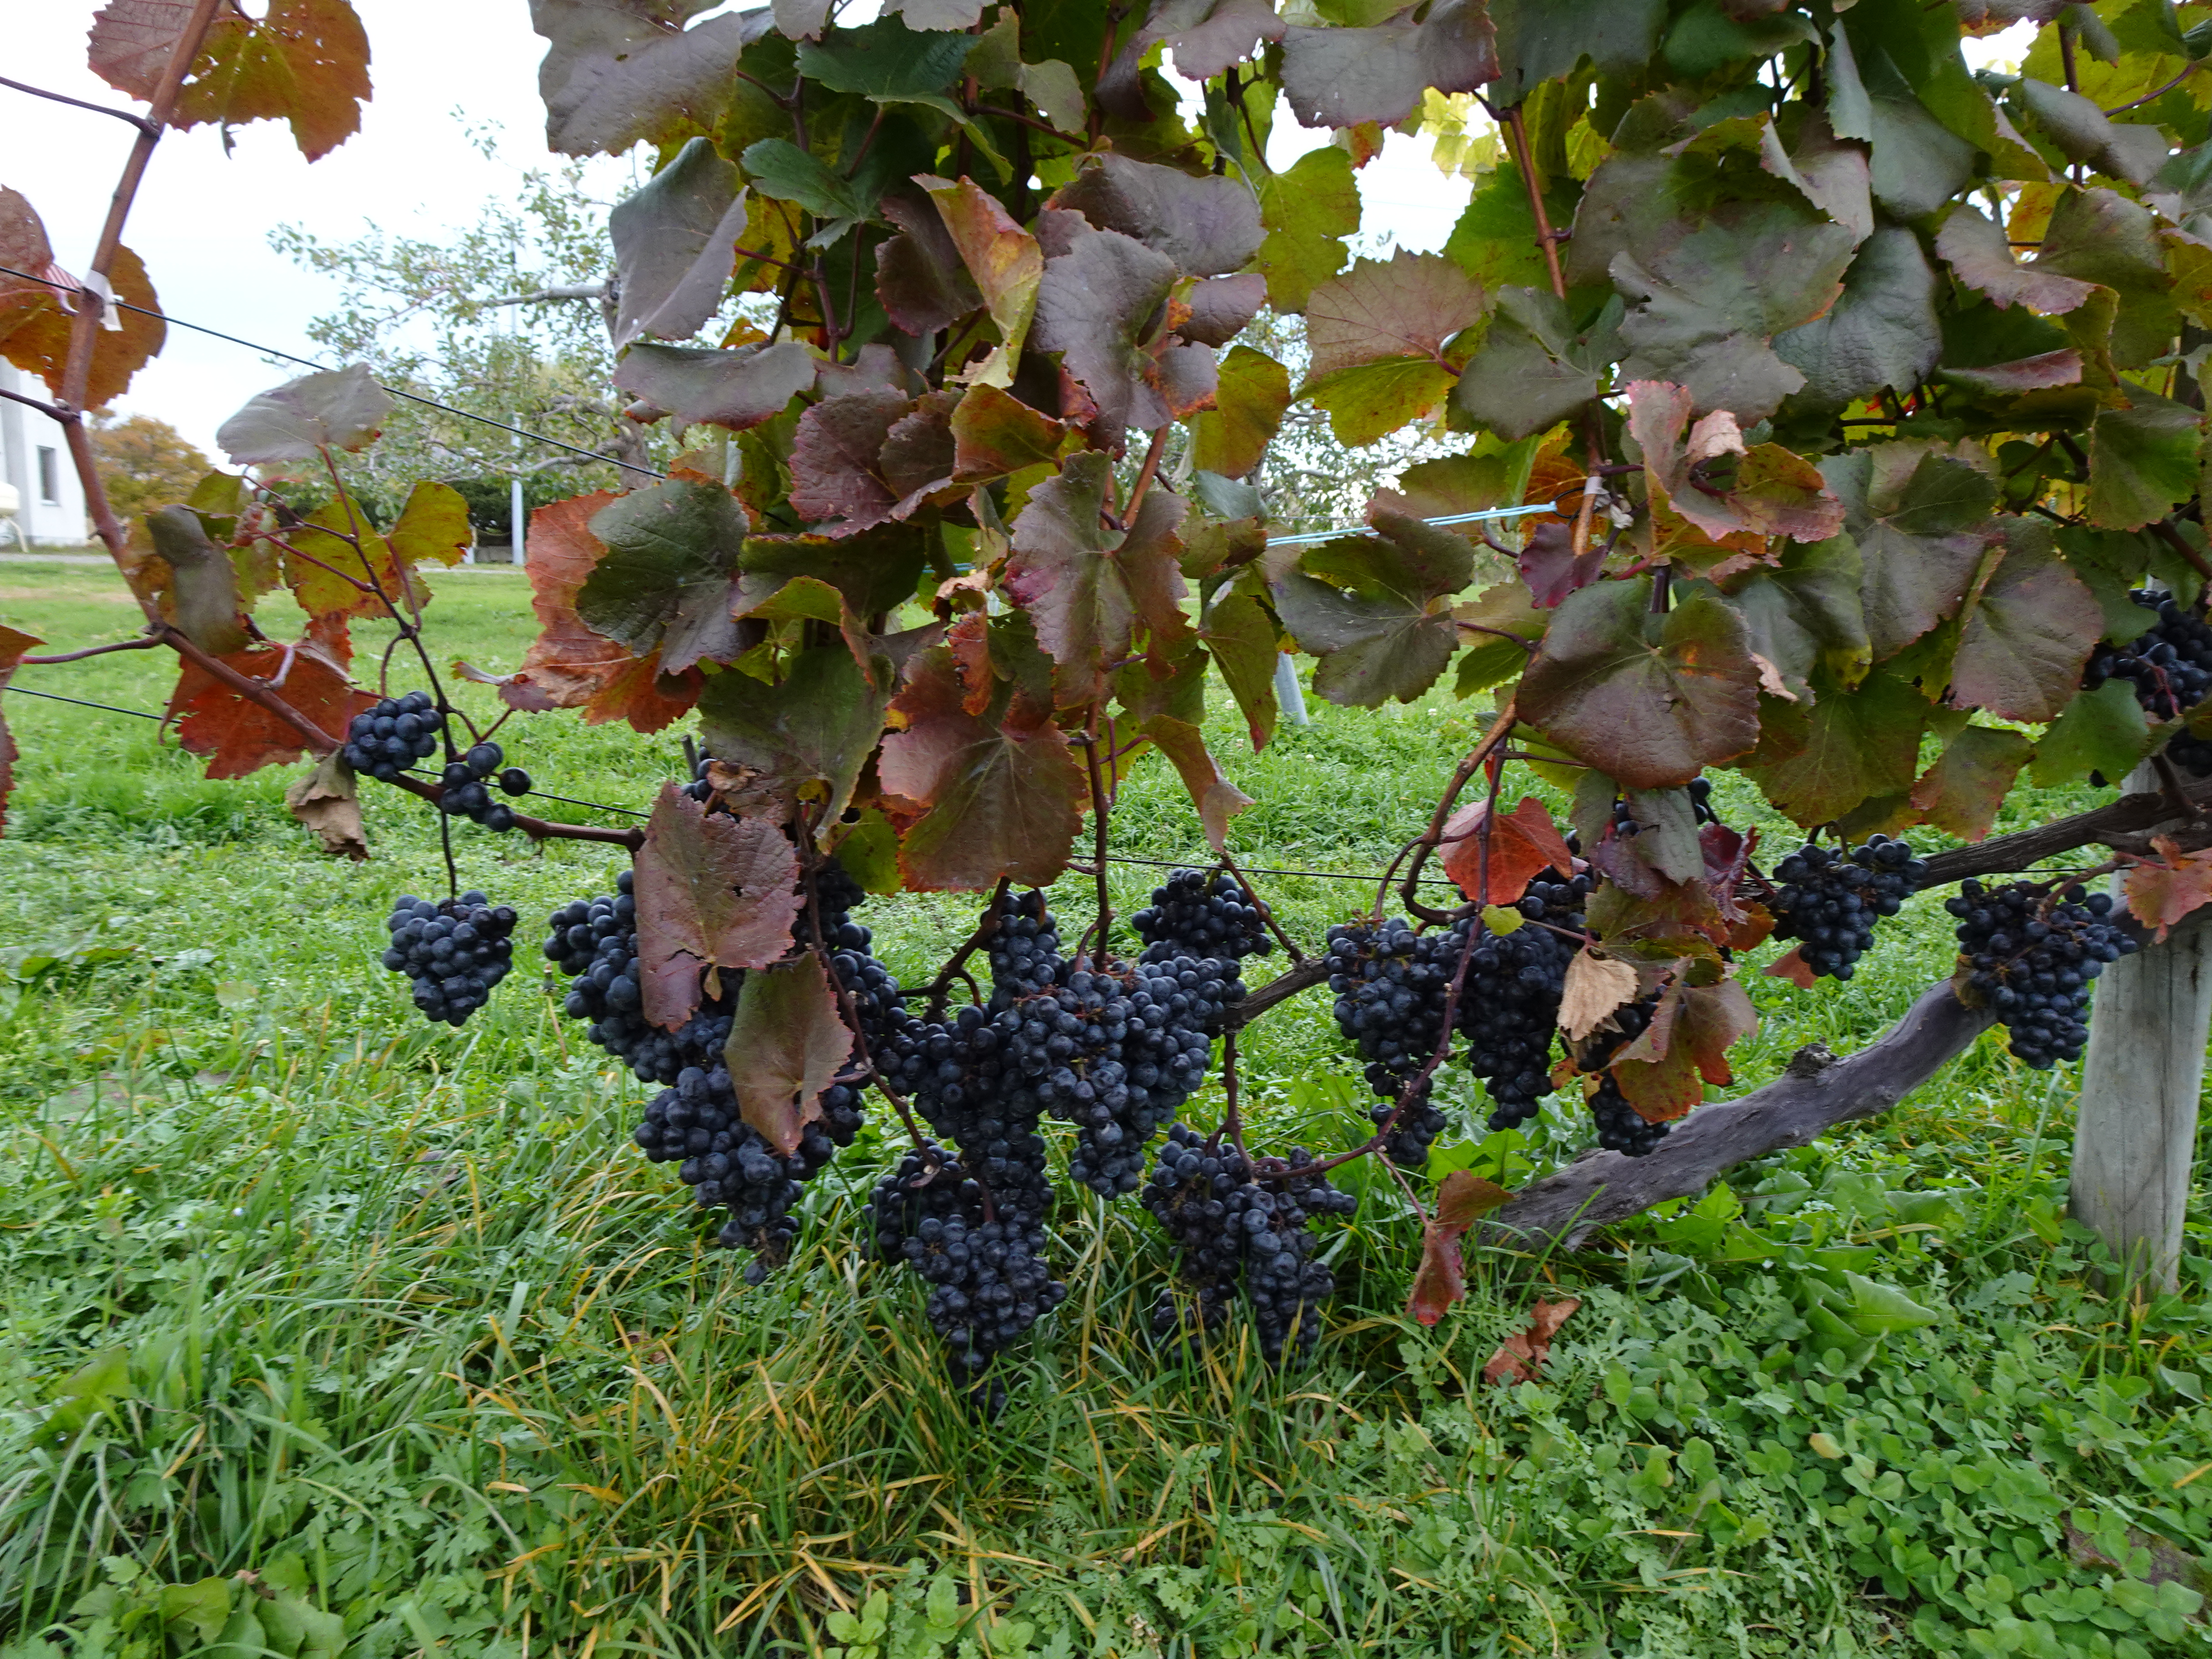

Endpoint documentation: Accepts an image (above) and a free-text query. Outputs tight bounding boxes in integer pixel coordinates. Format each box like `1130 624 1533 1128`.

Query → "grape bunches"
1445 891 1596 1133
2175 810 2212 851
901 1190 1068 1426
339 690 447 782
826 918 939 1101
382 889 520 1029
781 1086 878 1184
677 732 738 821
542 869 651 1071
1130 865 1274 977
1767 831 1937 981
977 887 1069 991
628 968 763 1090
854 1135 992 1267
1521 773 1711 895
2080 586 2212 725
1940 865 2141 1072
1320 915 1466 1168
2169 726 2212 775
1219 1148 1346 1376
437 736 534 837
998 952 1255 1153
1143 1120 1244 1376
784 803 871 956
1559 983 1691 1162
634 1064 808 1290
914 992 1062 1184
1067 1118 1145 1206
